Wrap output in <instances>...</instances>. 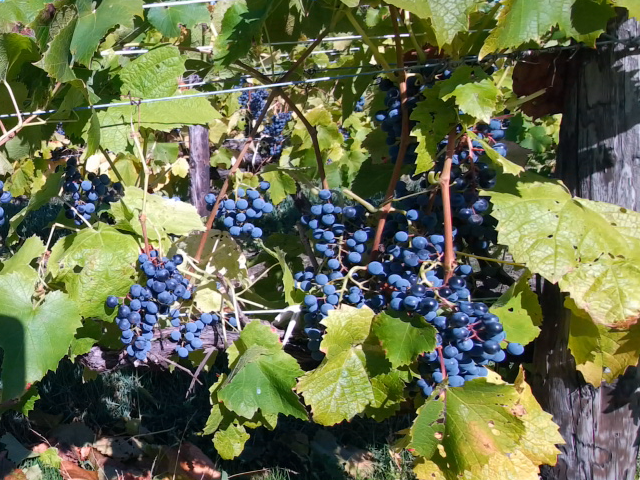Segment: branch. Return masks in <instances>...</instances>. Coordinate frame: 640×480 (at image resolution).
<instances>
[{
	"instance_id": "obj_2",
	"label": "branch",
	"mask_w": 640,
	"mask_h": 480,
	"mask_svg": "<svg viewBox=\"0 0 640 480\" xmlns=\"http://www.w3.org/2000/svg\"><path fill=\"white\" fill-rule=\"evenodd\" d=\"M398 78H399V86H400V103L402 108V136L400 138L399 147L397 150L395 166L392 171L391 183L385 197V203H384L383 209L380 213L379 222L377 225V231L373 237L371 247L368 250V258L370 260H374L376 258L375 252L378 250L381 237L383 236V233H384L387 216H388V213L390 212V211H387V208H390L392 205L393 196L395 194V191L398 185L400 170L403 165V157L406 149L407 140L409 138V106L407 101V83H406L405 72L399 71Z\"/></svg>"
},
{
	"instance_id": "obj_3",
	"label": "branch",
	"mask_w": 640,
	"mask_h": 480,
	"mask_svg": "<svg viewBox=\"0 0 640 480\" xmlns=\"http://www.w3.org/2000/svg\"><path fill=\"white\" fill-rule=\"evenodd\" d=\"M455 141V128L450 126L448 128V139L445 151V163L442 168V180H441V192L442 201L444 206V240L447 246L446 255L444 258V279L449 281L451 279V260L453 258L454 243L451 238V204L449 199L448 183L450 179L451 166H452V153Z\"/></svg>"
},
{
	"instance_id": "obj_6",
	"label": "branch",
	"mask_w": 640,
	"mask_h": 480,
	"mask_svg": "<svg viewBox=\"0 0 640 480\" xmlns=\"http://www.w3.org/2000/svg\"><path fill=\"white\" fill-rule=\"evenodd\" d=\"M390 14L393 20V29L395 35V49L397 54V66H404V52L402 47V33L400 26V17L397 12V3H390Z\"/></svg>"
},
{
	"instance_id": "obj_1",
	"label": "branch",
	"mask_w": 640,
	"mask_h": 480,
	"mask_svg": "<svg viewBox=\"0 0 640 480\" xmlns=\"http://www.w3.org/2000/svg\"><path fill=\"white\" fill-rule=\"evenodd\" d=\"M282 96L283 99L285 100L286 104L303 120V122L305 123L308 131L310 132V135L315 143V156H316V162L319 168V175H320V183L324 188H327L329 186V182L327 180V172H326V166H325V162L323 160V154H322V141L320 139V136L317 133L316 128L314 127L311 119L309 118V116L302 111V109L292 100L291 96L289 95V93L282 89V88H273L272 89V93L269 95L268 99L266 100V102L264 103L262 110L258 116V118L256 119V121L254 122V125L251 127L249 134L246 136L244 143L242 145V148L240 150V152L238 153L236 160L234 161L232 168L229 170V172L226 174L225 179L223 180L222 186L216 196L215 202L210 210V214L206 219V223L204 224V233L201 235V239L199 241V244L196 246L195 250H194V254L193 257L195 259H199L201 257V253L204 249V247L206 246L207 242H208V237H209V232L211 231V227L213 226V222L217 217V213L222 205V201L223 198L225 197V194L227 193L230 183L232 182V179L235 175L233 167H236L237 170H239L245 156L247 155V152L249 151V148L251 146V143L253 141V139L255 138L258 130L260 129L263 121L266 119L268 113H269V109L270 107L273 105V102L276 100V98L278 96Z\"/></svg>"
},
{
	"instance_id": "obj_7",
	"label": "branch",
	"mask_w": 640,
	"mask_h": 480,
	"mask_svg": "<svg viewBox=\"0 0 640 480\" xmlns=\"http://www.w3.org/2000/svg\"><path fill=\"white\" fill-rule=\"evenodd\" d=\"M234 64L252 73L257 79H260L266 83H274V79L272 77L268 76L265 73L260 72L257 68H255L254 66L250 65L249 63L241 59H236L234 61Z\"/></svg>"
},
{
	"instance_id": "obj_5",
	"label": "branch",
	"mask_w": 640,
	"mask_h": 480,
	"mask_svg": "<svg viewBox=\"0 0 640 480\" xmlns=\"http://www.w3.org/2000/svg\"><path fill=\"white\" fill-rule=\"evenodd\" d=\"M131 137H132L133 144L135 145V149L138 152V156L141 159L142 166L144 168V178L142 179V184H141V208L139 210V215H140V221H141V232L143 234L142 236L143 249L145 253H148L149 252L148 239H147L148 232L146 229V221L143 218V215H145V210H146V187H147V182L149 181V165L147 163L146 156L143 154L142 147L138 142L137 134L135 131L131 132Z\"/></svg>"
},
{
	"instance_id": "obj_4",
	"label": "branch",
	"mask_w": 640,
	"mask_h": 480,
	"mask_svg": "<svg viewBox=\"0 0 640 480\" xmlns=\"http://www.w3.org/2000/svg\"><path fill=\"white\" fill-rule=\"evenodd\" d=\"M349 11L347 6H344L338 13V15L331 21L328 20L322 30L317 34V36L311 41V43L303 50L301 55L296 58L287 68L286 70L277 76V80L279 82H284L289 75L301 65L306 58L310 55V53L318 46V44L324 39V37L329 33L333 24L339 25L342 19L345 17L346 13Z\"/></svg>"
}]
</instances>
